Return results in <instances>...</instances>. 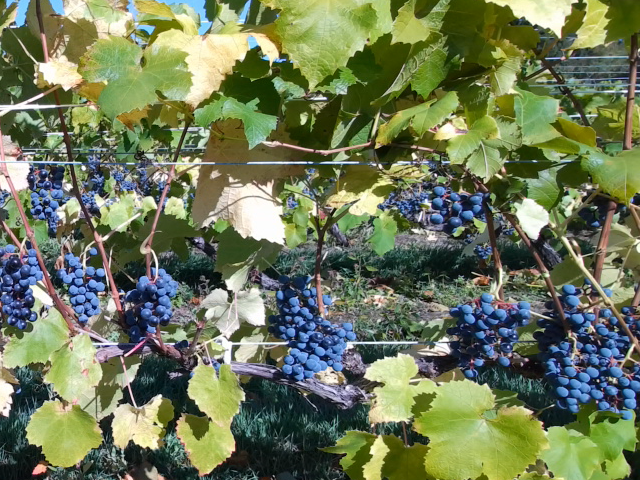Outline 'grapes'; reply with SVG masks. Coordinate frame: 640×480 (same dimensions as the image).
Masks as SVG:
<instances>
[{
  "mask_svg": "<svg viewBox=\"0 0 640 480\" xmlns=\"http://www.w3.org/2000/svg\"><path fill=\"white\" fill-rule=\"evenodd\" d=\"M594 331L608 338L604 346H598L593 342L576 343L578 349H583L582 360L586 365L583 372H577L571 359L572 343L562 340L559 344L548 347L549 357L545 362V378H552L557 385L554 388V395L558 397L555 406L558 410L567 409L570 413L580 411V402L588 403L592 398L598 400V411H609L622 413L623 421H631L633 412L631 410H619L612 407V404L605 400V395L615 396L619 393L616 385L607 382V376L618 379V384L625 387L621 391L624 397L623 406L627 409H635L638 406L636 392H640V365L634 363L633 379H629L623 374V370L617 366V362H622L625 358L621 350L631 347L630 339L621 336L619 333L609 331L604 323L593 325Z\"/></svg>",
  "mask_w": 640,
  "mask_h": 480,
  "instance_id": "01657485",
  "label": "grapes"
},
{
  "mask_svg": "<svg viewBox=\"0 0 640 480\" xmlns=\"http://www.w3.org/2000/svg\"><path fill=\"white\" fill-rule=\"evenodd\" d=\"M279 283L284 284L276 292L280 314L269 315L267 322L276 324L267 331L275 338L288 341L290 353L284 357L282 370L293 375L295 380L313 378L314 373L326 371L331 367L334 371H343L342 354L347 348L345 340L354 341L356 333L352 331L354 324L344 321L341 326L332 325L324 317L314 316L317 309L316 287H308L310 276H296L294 287L308 297L307 304L295 296V291L287 285L289 276L280 274Z\"/></svg>",
  "mask_w": 640,
  "mask_h": 480,
  "instance_id": "b958b902",
  "label": "grapes"
},
{
  "mask_svg": "<svg viewBox=\"0 0 640 480\" xmlns=\"http://www.w3.org/2000/svg\"><path fill=\"white\" fill-rule=\"evenodd\" d=\"M493 295L483 293L480 307L473 311L470 305H457L449 309L451 317H458L456 326L464 336L474 335L482 339L481 350L488 356L495 355V344L500 340V349L505 353L513 352V345L519 340L517 328L529 325L531 302L521 300L513 303L509 312L492 307Z\"/></svg>",
  "mask_w": 640,
  "mask_h": 480,
  "instance_id": "0513c4c2",
  "label": "grapes"
},
{
  "mask_svg": "<svg viewBox=\"0 0 640 480\" xmlns=\"http://www.w3.org/2000/svg\"><path fill=\"white\" fill-rule=\"evenodd\" d=\"M22 259L26 265H22L20 258L15 256L5 258L0 263V302L4 303L1 311L9 316L7 323L20 330L28 327L26 320H38L37 313L31 310L35 298L29 285H36L43 279L33 249H29Z\"/></svg>",
  "mask_w": 640,
  "mask_h": 480,
  "instance_id": "84f90ec7",
  "label": "grapes"
},
{
  "mask_svg": "<svg viewBox=\"0 0 640 480\" xmlns=\"http://www.w3.org/2000/svg\"><path fill=\"white\" fill-rule=\"evenodd\" d=\"M157 277L153 284L147 276L142 275L135 288L130 289L125 295L127 302L143 303L135 307L136 316L141 318L139 323H136L132 310L126 312L130 340L134 343H140L146 333L154 335L156 324L166 326L173 316L170 297H177L178 282L165 268L157 269Z\"/></svg>",
  "mask_w": 640,
  "mask_h": 480,
  "instance_id": "f8a65327",
  "label": "grapes"
},
{
  "mask_svg": "<svg viewBox=\"0 0 640 480\" xmlns=\"http://www.w3.org/2000/svg\"><path fill=\"white\" fill-rule=\"evenodd\" d=\"M64 259L68 261V266L73 267L72 272L66 269H58L56 277L62 279L64 284H68V293L71 295L70 303L76 314L79 315L80 323H87L89 318L100 314L99 299L96 291L105 290V284L101 281L105 276L103 268L87 267L85 273L89 277L86 283H83V265L81 259L73 253H66Z\"/></svg>",
  "mask_w": 640,
  "mask_h": 480,
  "instance_id": "5460f4e3",
  "label": "grapes"
},
{
  "mask_svg": "<svg viewBox=\"0 0 640 480\" xmlns=\"http://www.w3.org/2000/svg\"><path fill=\"white\" fill-rule=\"evenodd\" d=\"M29 172L27 182L29 183V189L33 192L30 194L31 205L33 207L29 209V212L33 219H48L51 231L56 233L59 221V216L56 211L59 209L60 203L51 200L49 195L53 199H61L65 195V192L61 188V180L63 179L65 168L63 166L53 167L51 169L53 178H50L48 181L46 179L49 177V172L46 169H41L38 172V177L40 178L38 183L34 165H29Z\"/></svg>",
  "mask_w": 640,
  "mask_h": 480,
  "instance_id": "83cd7487",
  "label": "grapes"
},
{
  "mask_svg": "<svg viewBox=\"0 0 640 480\" xmlns=\"http://www.w3.org/2000/svg\"><path fill=\"white\" fill-rule=\"evenodd\" d=\"M563 293L560 298L563 304H567V308L564 310L565 314L574 325H576V334L579 337H588L590 332L587 330L595 321V315L593 312H580L578 311V305L581 303V298L577 296L580 293L578 288L572 283H566L561 287Z\"/></svg>",
  "mask_w": 640,
  "mask_h": 480,
  "instance_id": "e5b3c951",
  "label": "grapes"
},
{
  "mask_svg": "<svg viewBox=\"0 0 640 480\" xmlns=\"http://www.w3.org/2000/svg\"><path fill=\"white\" fill-rule=\"evenodd\" d=\"M449 200L455 204L451 207L452 216L448 220V224L443 227V231L446 234H454L457 228L463 225V220L471 221L473 217L483 212L482 201L484 200V194L482 192H476L469 198L472 204L469 210H465L462 203H456L462 200L460 194L452 192L449 195Z\"/></svg>",
  "mask_w": 640,
  "mask_h": 480,
  "instance_id": "2adb6a1f",
  "label": "grapes"
},
{
  "mask_svg": "<svg viewBox=\"0 0 640 480\" xmlns=\"http://www.w3.org/2000/svg\"><path fill=\"white\" fill-rule=\"evenodd\" d=\"M433 192L435 193L436 196L431 200L430 207L433 210H440V211L439 213H432L429 216V221L433 225H439V224H443L446 221V218L444 216L448 214V205L441 197L447 193V188L445 186H436L433 189Z\"/></svg>",
  "mask_w": 640,
  "mask_h": 480,
  "instance_id": "ef6de9ee",
  "label": "grapes"
},
{
  "mask_svg": "<svg viewBox=\"0 0 640 480\" xmlns=\"http://www.w3.org/2000/svg\"><path fill=\"white\" fill-rule=\"evenodd\" d=\"M634 312V309L632 307H622L621 308V313L624 316V320H625V324L628 328L633 329L634 326H636L637 330H640V319H635L634 317H632V314Z\"/></svg>",
  "mask_w": 640,
  "mask_h": 480,
  "instance_id": "1ff8f66d",
  "label": "grapes"
},
{
  "mask_svg": "<svg viewBox=\"0 0 640 480\" xmlns=\"http://www.w3.org/2000/svg\"><path fill=\"white\" fill-rule=\"evenodd\" d=\"M599 315H600V317H603V318H610L609 319V323L610 324H613V325H618L619 324L618 321L616 320V318L614 316H612V311L610 310V308H602L599 311Z\"/></svg>",
  "mask_w": 640,
  "mask_h": 480,
  "instance_id": "54f908b8",
  "label": "grapes"
},
{
  "mask_svg": "<svg viewBox=\"0 0 640 480\" xmlns=\"http://www.w3.org/2000/svg\"><path fill=\"white\" fill-rule=\"evenodd\" d=\"M584 283H585V285H591V283L589 282L587 277H584ZM591 290L593 292L591 294V297H594V296L600 297V294L594 289V287L592 285H591Z\"/></svg>",
  "mask_w": 640,
  "mask_h": 480,
  "instance_id": "91a60905",
  "label": "grapes"
}]
</instances>
